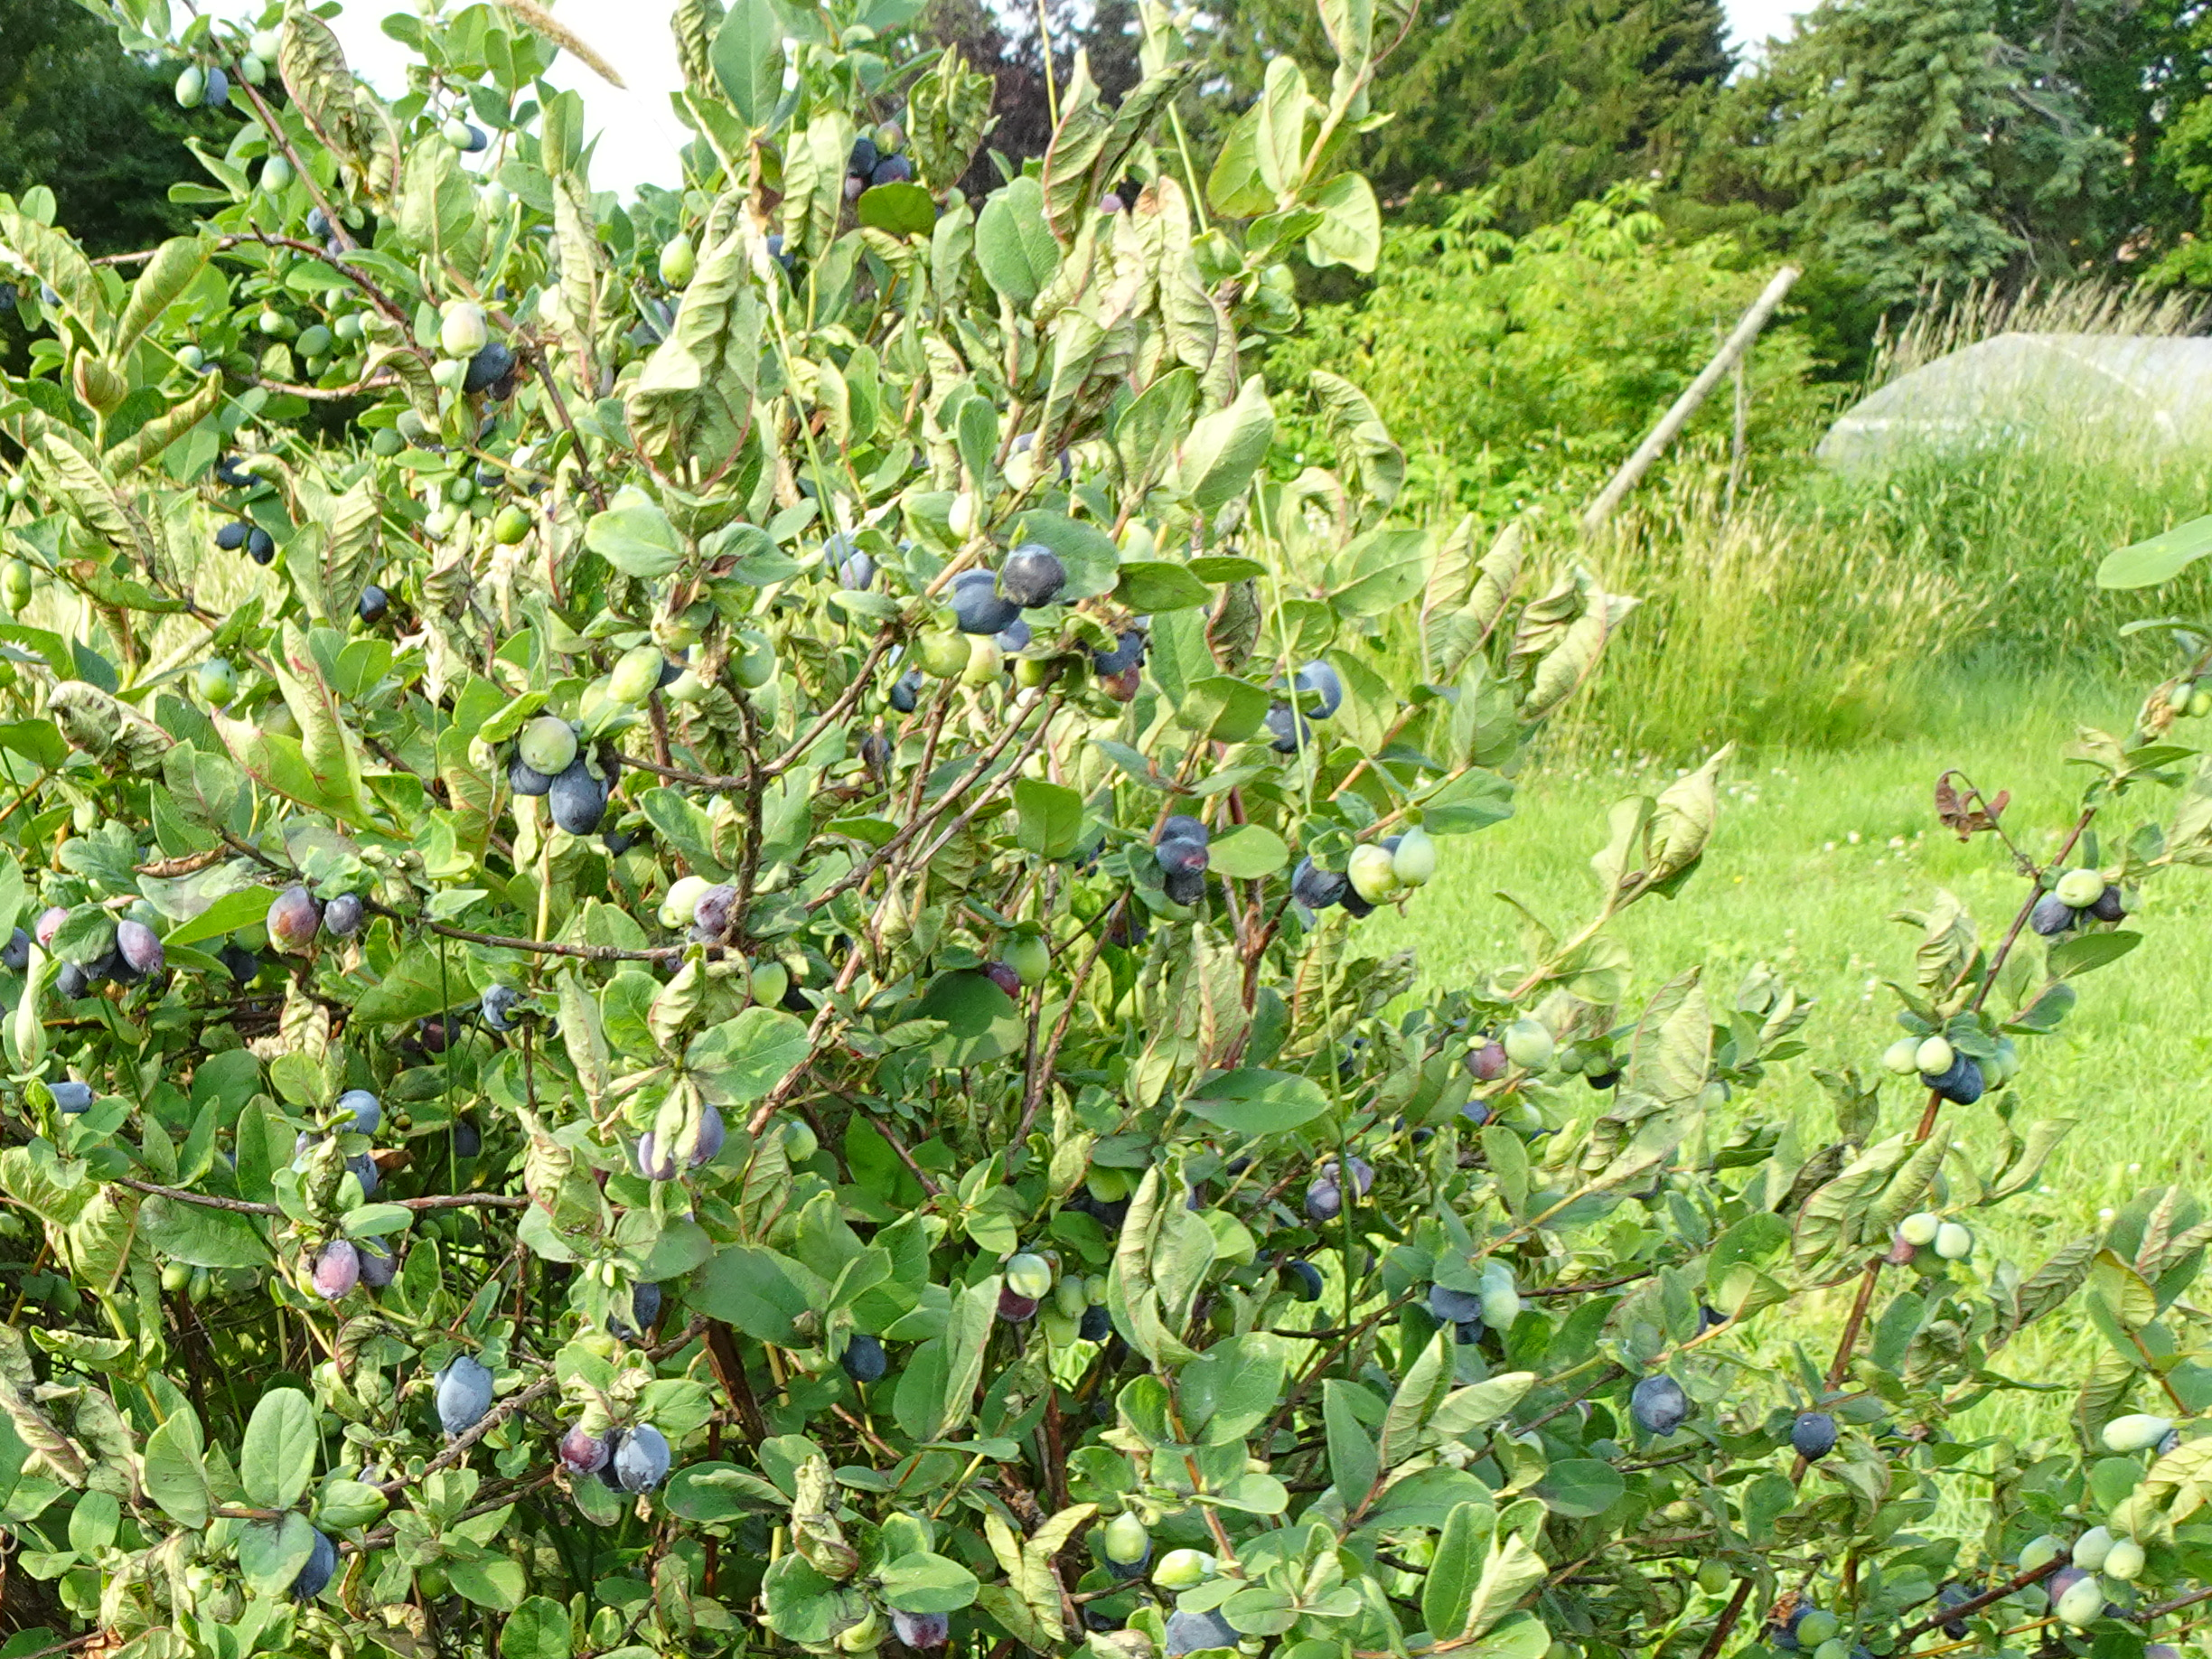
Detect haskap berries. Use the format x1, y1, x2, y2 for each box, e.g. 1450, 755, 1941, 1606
306, 348, 332, 377
603, 827, 631, 858
2160, 1429, 2178, 1457
1585, 1073, 1620, 1089
1832, 1644, 1877, 1659
249, 527, 275, 564
545, 763, 612, 836
1430, 1283, 1482, 1324
1381, 835, 1402, 856
41, 282, 62, 307
1057, 1275, 1088, 1318
353, 817, 394, 834
1994, 1647, 2035, 1659
328, 234, 354, 257
1463, 1046, 1507, 1081
139, 845, 151, 862
1322, 1155, 1373, 1198
1706, 1306, 1727, 1326
2099, 1597, 2134, 1617
996, 1279, 1039, 1322
1256, 1250, 1270, 1262
845, 140, 876, 177
1440, 1017, 1489, 1049
2057, 869, 2104, 908
1697, 1558, 1731, 1595
1885, 1236, 1916, 1266
575, 743, 622, 792
781, 1121, 819, 1162
442, 304, 485, 357
1555, 1640, 1582, 1659
825, 530, 860, 568
218, 948, 229, 966
679, 601, 719, 628
1632, 1376, 1684, 1436
1077, 1400, 1106, 1432
334, 314, 361, 340
2091, 886, 2129, 921
845, 175, 863, 203
2020, 1534, 2073, 1576
1701, 1083, 1724, 1112
482, 983, 521, 1029
2100, 1416, 2171, 1453
295, 1131, 324, 1158
1530, 1127, 1562, 1143
330, 1086, 388, 1137
515, 479, 548, 496
1392, 1114, 1432, 1147
1793, 1412, 1835, 1464
561, 1419, 610, 1473
442, 117, 473, 150
1919, 1049, 1964, 1088
1110, 1344, 1126, 1373
1876, 1425, 1907, 1453
494, 503, 531, 545
1693, 1305, 1708, 1338
250, 31, 279, 63
1306, 1176, 1345, 1219
419, 1564, 450, 1598
959, 634, 999, 691
1899, 1210, 1939, 1246
449, 478, 472, 504
468, 731, 515, 770
198, 656, 238, 702
869, 155, 911, 188
614, 1423, 670, 1495
434, 1367, 449, 1391
1395, 825, 1438, 889
1771, 1605, 1812, 1651
359, 585, 386, 623
1164, 872, 1203, 905
1008, 693, 1048, 730
73, 799, 97, 833
0, 283, 16, 308
55, 959, 90, 998
1152, 1548, 1222, 1584
1932, 1223, 1969, 1259
682, 1211, 694, 1224
846, 1605, 876, 1642
2062, 1503, 2084, 1521
1087, 1189, 1128, 1225
1101, 194, 1122, 213
492, 374, 516, 400
396, 410, 428, 436
342, 1153, 378, 1195
1098, 837, 1105, 853
520, 716, 577, 775
667, 1104, 723, 1169
1003, 544, 1065, 611
1506, 1104, 1541, 1131
1154, 839, 1210, 879
418, 1018, 429, 1030
431, 359, 460, 385
651, 605, 704, 649
1574, 1404, 1586, 1429
1079, 1306, 1111, 1340
261, 312, 284, 336
2104, 1536, 2144, 1580
1047, 639, 1083, 669
841, 549, 874, 591
793, 1343, 836, 1375
1073, 845, 1098, 879
890, 680, 917, 714
706, 793, 731, 820
475, 459, 506, 486
2031, 895, 2076, 934
215, 521, 248, 551
1348, 843, 1401, 906
2045, 1565, 2087, 1606
593, 649, 612, 672
897, 540, 918, 552
201, 362, 219, 373
222, 1153, 238, 1169
177, 345, 202, 373
1285, 1259, 1322, 1301
1003, 450, 1063, 495
1088, 1165, 1128, 1201
1641, 1194, 1664, 1211
658, 267, 687, 292
946, 570, 1020, 633
664, 641, 719, 698
263, 61, 281, 77
1479, 1275, 1519, 1333
545, 1259, 573, 1280
360, 309, 376, 329
272, 318, 301, 339
1558, 1048, 1585, 1074
1813, 1632, 1854, 1659
842, 1609, 887, 1653
645, 299, 671, 341
2171, 684, 2191, 714
251, 475, 276, 500
898, 669, 924, 692
1037, 1298, 1079, 1347
1914, 1035, 1954, 1073
1292, 854, 1346, 908
660, 230, 696, 288
234, 923, 267, 953
0, 964, 13, 1022
464, 343, 513, 392
695, 881, 741, 931
324, 892, 364, 935
421, 1014, 460, 1052
316, 1412, 342, 1438
1075, 631, 1140, 673
1632, 1176, 1661, 1199
874, 119, 901, 156
1106, 1510, 1146, 1564
892, 1605, 947, 1649
1119, 521, 1154, 568
638, 1132, 676, 1180
840, 1332, 884, 1381
1796, 1610, 1842, 1647
1505, 1024, 1553, 1069
1354, 1038, 1367, 1049
187, 1267, 208, 1306
1670, 1172, 1692, 1193
47, 1082, 94, 1115
3, 559, 31, 593
1938, 1582, 1976, 1640
1261, 678, 1309, 755
2, 580, 32, 612
50, 1276, 81, 1311
1483, 1260, 1512, 1289
1294, 662, 1342, 720
597, 1429, 627, 1489
261, 153, 290, 193
1994, 1050, 2018, 1080
1459, 1100, 1495, 1126
2139, 1645, 2181, 1659
162, 1260, 193, 1291
1544, 1641, 1564, 1659
288, 161, 297, 187
202, 67, 228, 108
1002, 931, 1051, 985
1338, 883, 1377, 921
294, 326, 332, 354
1006, 1254, 1050, 1298
176, 63, 208, 108
357, 1464, 386, 1495
508, 753, 552, 797
608, 1281, 660, 1342
1975, 1057, 2000, 1092
765, 236, 792, 272
443, 502, 467, 528
1083, 1604, 1126, 1631
1108, 1541, 1154, 1578
325, 288, 349, 314
2071, 1523, 2117, 1569
372, 426, 403, 457
443, 1113, 481, 1159
0, 1212, 24, 1240
216, 455, 257, 485
1580, 1398, 1595, 1421
1083, 1272, 1110, 1304
468, 495, 495, 518
1226, 1154, 1253, 1176
35, 905, 68, 949
511, 446, 539, 471
1185, 1183, 1195, 1211
865, 682, 886, 716
790, 418, 827, 440
0, 927, 28, 969
654, 646, 689, 690
309, 206, 329, 236
537, 1017, 558, 1038
1096, 663, 1140, 700
242, 52, 266, 85
356, 1235, 397, 1289
1496, 1418, 1543, 1459
862, 732, 892, 769
996, 616, 1030, 649
1995, 1037, 2012, 1057
344, 205, 365, 229
1150, 815, 1210, 844
1109, 900, 1149, 948
77, 948, 117, 978
287, 1526, 335, 1601
226, 946, 257, 982
479, 402, 495, 439
437, 1357, 492, 1432
461, 124, 486, 153
1003, 658, 1015, 672
1436, 1317, 1484, 1345
487, 282, 507, 300
1328, 1049, 1355, 1083
1583, 1056, 1612, 1079
1883, 1036, 1922, 1075
400, 1036, 433, 1064
1163, 1602, 1240, 1659
949, 491, 995, 538
603, 644, 664, 703
2056, 1576, 2105, 1623
1015, 656, 1046, 685
361, 360, 388, 382
118, 920, 165, 973
659, 875, 715, 926
312, 1240, 360, 1299
266, 882, 321, 955
1010, 432, 1072, 479
1360, 1250, 1375, 1278
109, 944, 145, 986
2187, 690, 2211, 717
911, 448, 929, 466
976, 962, 1023, 1000
9, 475, 26, 502
728, 630, 776, 685
1941, 1059, 1982, 1106
913, 624, 969, 678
